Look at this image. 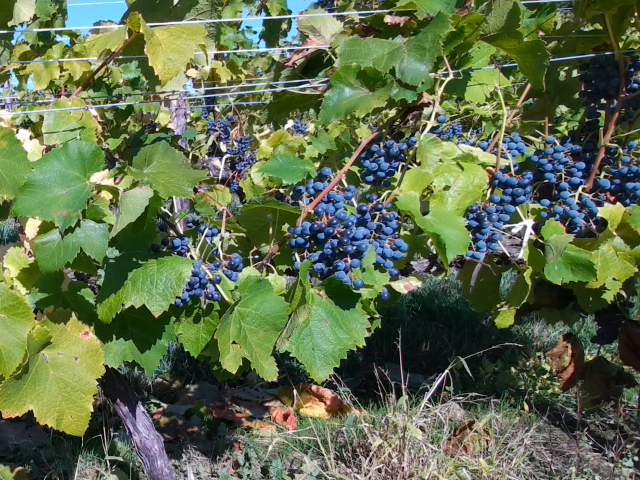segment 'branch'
Wrapping results in <instances>:
<instances>
[{"instance_id":"branch-5","label":"branch","mask_w":640,"mask_h":480,"mask_svg":"<svg viewBox=\"0 0 640 480\" xmlns=\"http://www.w3.org/2000/svg\"><path fill=\"white\" fill-rule=\"evenodd\" d=\"M452 78H453V75L452 74H448L441 81V84L439 86L437 95L435 96L433 102L431 103V107L429 108L428 119L426 121V124L424 125L423 129L420 132V138L421 139L425 138V135H426L428 129L430 128V126H431V124L433 122L434 110L436 109V106H437L440 98L443 95V91L445 89V86H446L447 82L449 80H451Z\"/></svg>"},{"instance_id":"branch-6","label":"branch","mask_w":640,"mask_h":480,"mask_svg":"<svg viewBox=\"0 0 640 480\" xmlns=\"http://www.w3.org/2000/svg\"><path fill=\"white\" fill-rule=\"evenodd\" d=\"M418 146H419V142L415 141L413 143L412 147L410 148L408 156H407L406 161H405V164H404L403 168L401 169V171H400V173L398 175L397 181H396L393 189L389 193V196L384 200L385 204H389L392 201V199L396 195L398 189L400 188L401 183H402L403 178H404V175L407 172V170L409 169L410 163L412 161V158H413L414 153L417 150Z\"/></svg>"},{"instance_id":"branch-1","label":"branch","mask_w":640,"mask_h":480,"mask_svg":"<svg viewBox=\"0 0 640 480\" xmlns=\"http://www.w3.org/2000/svg\"><path fill=\"white\" fill-rule=\"evenodd\" d=\"M412 109V105L408 104L406 106V108H404L402 111H399L397 113H395L393 116H391L390 118H388L384 123L380 124L364 141H362L356 148L355 150L352 151V153L350 154L349 159L347 160V162L343 165V167L341 168V170L339 171V173L337 174V176H335L330 183L328 184V186L318 194V196H316L307 206L306 208L303 210V212L299 215V217L297 218L295 225L299 226L302 222V220L307 216V214L310 212V210L329 192L332 190V188L334 187L335 183L338 182L343 176L344 173L347 171V169L352 165L353 161L355 160V157L357 156V154L371 141L373 140L378 134L379 132H381L383 129H385L386 127H388L392 122H394L396 119L400 118L401 116L406 115L410 110Z\"/></svg>"},{"instance_id":"branch-4","label":"branch","mask_w":640,"mask_h":480,"mask_svg":"<svg viewBox=\"0 0 640 480\" xmlns=\"http://www.w3.org/2000/svg\"><path fill=\"white\" fill-rule=\"evenodd\" d=\"M138 35L139 32L135 31L131 35L127 36L124 42L116 50L113 51V53L106 59V61L103 62L102 65L99 66L91 75H89L85 82L79 86V88L68 95V99L72 100L76 95L81 93L92 82V80L96 76H98L115 59V57L128 46L131 40H133Z\"/></svg>"},{"instance_id":"branch-8","label":"branch","mask_w":640,"mask_h":480,"mask_svg":"<svg viewBox=\"0 0 640 480\" xmlns=\"http://www.w3.org/2000/svg\"><path fill=\"white\" fill-rule=\"evenodd\" d=\"M493 175H494V174H492L491 184L489 185V189H490V190H492V191H491V193H490V195H491V194H493L494 189H495V186L493 185Z\"/></svg>"},{"instance_id":"branch-3","label":"branch","mask_w":640,"mask_h":480,"mask_svg":"<svg viewBox=\"0 0 640 480\" xmlns=\"http://www.w3.org/2000/svg\"><path fill=\"white\" fill-rule=\"evenodd\" d=\"M622 57H623V53L619 52L617 54V63H618L619 71H620L621 92H620L619 97L616 100L615 114L612 116V120H611V124H610L609 130H607L606 133H605V136L603 138V142H602V144H601V146H600V148L598 150L597 157H596L595 161L593 162V165H592V168H591L587 183L585 185V192L586 193L590 192V187L592 185V182H593L597 167H598V165H599V163H600V161L602 159V156H603L605 148H606V146L608 144L609 138L614 133V129L616 127V120H617V117H618V114H619V110H620V107H621V103H622V100H623V97H624V93H625V74H624V66H623Z\"/></svg>"},{"instance_id":"branch-7","label":"branch","mask_w":640,"mask_h":480,"mask_svg":"<svg viewBox=\"0 0 640 480\" xmlns=\"http://www.w3.org/2000/svg\"><path fill=\"white\" fill-rule=\"evenodd\" d=\"M287 243V239L283 238L281 239L275 246L272 247V249L268 252V254L265 256V258L256 266L257 270H260L262 267H264L268 261L271 259V257L275 254V252L284 244Z\"/></svg>"},{"instance_id":"branch-2","label":"branch","mask_w":640,"mask_h":480,"mask_svg":"<svg viewBox=\"0 0 640 480\" xmlns=\"http://www.w3.org/2000/svg\"><path fill=\"white\" fill-rule=\"evenodd\" d=\"M533 84L532 80H529L526 85L525 88L522 90L521 94L519 95L515 106L513 108V110L511 111V113L508 116V109H507V104L505 101V98L502 94V91L500 89H496L495 93L497 94L499 101L501 103L502 106V112H503V122L502 125L500 126V128L497 130V133L495 134L491 144L487 147L486 152L490 153L494 147L496 146L497 142L499 141V145L497 147V151H496V164H495V170L499 171L500 170V166H501V154H502V150L504 148V136L506 133V129H507V125L514 119L515 115L517 114V112L520 109V106L526 96V94L528 93V91L530 90L531 86Z\"/></svg>"}]
</instances>
